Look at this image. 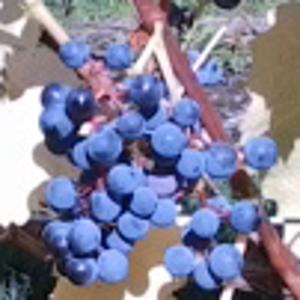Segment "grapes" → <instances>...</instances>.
Here are the masks:
<instances>
[{
    "instance_id": "grapes-1",
    "label": "grapes",
    "mask_w": 300,
    "mask_h": 300,
    "mask_svg": "<svg viewBox=\"0 0 300 300\" xmlns=\"http://www.w3.org/2000/svg\"><path fill=\"white\" fill-rule=\"evenodd\" d=\"M125 111L105 117L96 91L64 83L42 87L39 130L53 155L63 154L86 172L71 181L51 175L45 205L53 216L41 228V241L57 259L56 271L80 288L95 280L124 283L134 243L150 229L165 230L174 221L182 180L226 181L239 169V154L225 142L204 151L190 144L186 131H202L201 111L189 97L164 108L168 84L151 72L130 77Z\"/></svg>"
},
{
    "instance_id": "grapes-2",
    "label": "grapes",
    "mask_w": 300,
    "mask_h": 300,
    "mask_svg": "<svg viewBox=\"0 0 300 300\" xmlns=\"http://www.w3.org/2000/svg\"><path fill=\"white\" fill-rule=\"evenodd\" d=\"M219 216L208 208H201L189 217L190 227L182 232L183 246H169L162 255L164 271L173 278L190 277L193 288L203 293H216L222 281L234 282L245 271V261L232 244L216 246L196 261L192 249L211 242L219 232Z\"/></svg>"
},
{
    "instance_id": "grapes-3",
    "label": "grapes",
    "mask_w": 300,
    "mask_h": 300,
    "mask_svg": "<svg viewBox=\"0 0 300 300\" xmlns=\"http://www.w3.org/2000/svg\"><path fill=\"white\" fill-rule=\"evenodd\" d=\"M280 154V145L272 136L254 134L242 145V163L249 171L272 169Z\"/></svg>"
},
{
    "instance_id": "grapes-4",
    "label": "grapes",
    "mask_w": 300,
    "mask_h": 300,
    "mask_svg": "<svg viewBox=\"0 0 300 300\" xmlns=\"http://www.w3.org/2000/svg\"><path fill=\"white\" fill-rule=\"evenodd\" d=\"M227 220L236 233L252 236L263 221V208L256 199H236L228 207Z\"/></svg>"
},
{
    "instance_id": "grapes-5",
    "label": "grapes",
    "mask_w": 300,
    "mask_h": 300,
    "mask_svg": "<svg viewBox=\"0 0 300 300\" xmlns=\"http://www.w3.org/2000/svg\"><path fill=\"white\" fill-rule=\"evenodd\" d=\"M90 57L89 44L80 39H68L59 48L60 61L69 71H78L84 68Z\"/></svg>"
},
{
    "instance_id": "grapes-6",
    "label": "grapes",
    "mask_w": 300,
    "mask_h": 300,
    "mask_svg": "<svg viewBox=\"0 0 300 300\" xmlns=\"http://www.w3.org/2000/svg\"><path fill=\"white\" fill-rule=\"evenodd\" d=\"M135 59L134 48L125 43H114L103 53V66L107 71L127 68Z\"/></svg>"
},
{
    "instance_id": "grapes-7",
    "label": "grapes",
    "mask_w": 300,
    "mask_h": 300,
    "mask_svg": "<svg viewBox=\"0 0 300 300\" xmlns=\"http://www.w3.org/2000/svg\"><path fill=\"white\" fill-rule=\"evenodd\" d=\"M194 78L201 85L215 86L223 78V66L217 59L209 58L197 68Z\"/></svg>"
},
{
    "instance_id": "grapes-8",
    "label": "grapes",
    "mask_w": 300,
    "mask_h": 300,
    "mask_svg": "<svg viewBox=\"0 0 300 300\" xmlns=\"http://www.w3.org/2000/svg\"><path fill=\"white\" fill-rule=\"evenodd\" d=\"M200 57V52L196 48H190L186 52V60L190 64H195L198 62Z\"/></svg>"
}]
</instances>
